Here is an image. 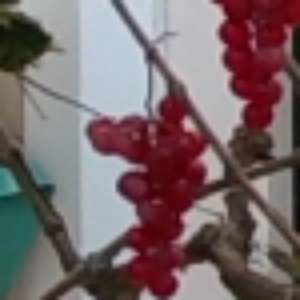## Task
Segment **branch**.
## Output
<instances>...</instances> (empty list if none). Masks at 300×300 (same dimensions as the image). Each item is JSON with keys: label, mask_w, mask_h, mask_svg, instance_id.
<instances>
[{"label": "branch", "mask_w": 300, "mask_h": 300, "mask_svg": "<svg viewBox=\"0 0 300 300\" xmlns=\"http://www.w3.org/2000/svg\"><path fill=\"white\" fill-rule=\"evenodd\" d=\"M0 165L8 169L21 197L27 203L41 231L49 241L58 263L67 278L44 293L40 300H58L87 279L98 275L112 265V258L128 247L127 232L100 251H90L82 263L67 235L62 216L53 212L44 193L36 183L23 157L21 147L11 143L0 130Z\"/></svg>", "instance_id": "1"}, {"label": "branch", "mask_w": 300, "mask_h": 300, "mask_svg": "<svg viewBox=\"0 0 300 300\" xmlns=\"http://www.w3.org/2000/svg\"><path fill=\"white\" fill-rule=\"evenodd\" d=\"M112 5L123 19L125 25L129 28L136 42L152 57L153 64L167 84V92L169 94H174L185 101L187 105V115L189 116L192 124L199 132L206 136L208 145L216 153L220 162L225 165L230 172L228 177L205 184L198 193L194 194L195 202L204 196H210L214 193L241 185L243 190L265 213L279 234L295 249H300V234L290 228L280 213L267 202V200L260 194V192L250 181L253 178L299 163L300 153L285 156L279 160L254 168L242 170L232 152L224 146L219 136L210 129L207 122L200 115L196 105L192 102L190 96L188 95L187 85L181 79H179L173 70L164 62L159 54V51L145 37L141 28L138 26L137 22L133 19L132 14L127 9L126 5L121 0H112Z\"/></svg>", "instance_id": "2"}, {"label": "branch", "mask_w": 300, "mask_h": 300, "mask_svg": "<svg viewBox=\"0 0 300 300\" xmlns=\"http://www.w3.org/2000/svg\"><path fill=\"white\" fill-rule=\"evenodd\" d=\"M283 72L289 75L294 80L300 81V64L294 61L292 58L288 59V63L283 69Z\"/></svg>", "instance_id": "3"}]
</instances>
